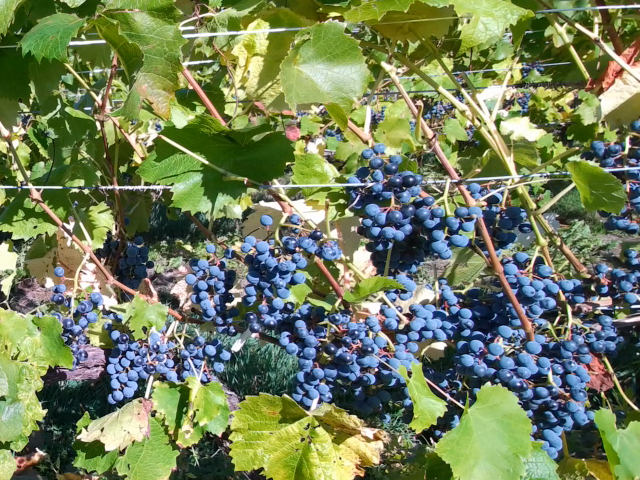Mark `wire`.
Here are the masks:
<instances>
[{"label": "wire", "instance_id": "wire-4", "mask_svg": "<svg viewBox=\"0 0 640 480\" xmlns=\"http://www.w3.org/2000/svg\"><path fill=\"white\" fill-rule=\"evenodd\" d=\"M453 22V17L439 16L433 18H413L410 20H392V21H365L358 23H347V28H360L367 26H394V25H412L415 23H435V22Z\"/></svg>", "mask_w": 640, "mask_h": 480}, {"label": "wire", "instance_id": "wire-3", "mask_svg": "<svg viewBox=\"0 0 640 480\" xmlns=\"http://www.w3.org/2000/svg\"><path fill=\"white\" fill-rule=\"evenodd\" d=\"M373 182L366 183H352V182H329V183H315V182H305L299 184H270L268 186L258 185L257 189L260 191H270L273 189H301L307 187L313 188H331V187H349V188H369L373 187Z\"/></svg>", "mask_w": 640, "mask_h": 480}, {"label": "wire", "instance_id": "wire-6", "mask_svg": "<svg viewBox=\"0 0 640 480\" xmlns=\"http://www.w3.org/2000/svg\"><path fill=\"white\" fill-rule=\"evenodd\" d=\"M99 189L101 191H116V190H129V191H168L171 189L170 185L164 184H143V185H114V186H104L100 185Z\"/></svg>", "mask_w": 640, "mask_h": 480}, {"label": "wire", "instance_id": "wire-1", "mask_svg": "<svg viewBox=\"0 0 640 480\" xmlns=\"http://www.w3.org/2000/svg\"><path fill=\"white\" fill-rule=\"evenodd\" d=\"M302 26L288 27V28H272V29H247L243 31H220V30H207L196 33H187L183 35L184 39L210 37V36H245L250 34H274V33H290L301 32Z\"/></svg>", "mask_w": 640, "mask_h": 480}, {"label": "wire", "instance_id": "wire-2", "mask_svg": "<svg viewBox=\"0 0 640 480\" xmlns=\"http://www.w3.org/2000/svg\"><path fill=\"white\" fill-rule=\"evenodd\" d=\"M570 169H558L557 171L533 172L527 174L513 173L499 176H472V177H453L449 179L450 183L456 182H474V181H501L506 179H530L535 177L559 176L561 174H570Z\"/></svg>", "mask_w": 640, "mask_h": 480}, {"label": "wire", "instance_id": "wire-5", "mask_svg": "<svg viewBox=\"0 0 640 480\" xmlns=\"http://www.w3.org/2000/svg\"><path fill=\"white\" fill-rule=\"evenodd\" d=\"M596 9H627V10H640V5L629 4H594V5H577V6H563L560 8H542L535 9V14L544 13H562L565 11H579V10H596Z\"/></svg>", "mask_w": 640, "mask_h": 480}]
</instances>
